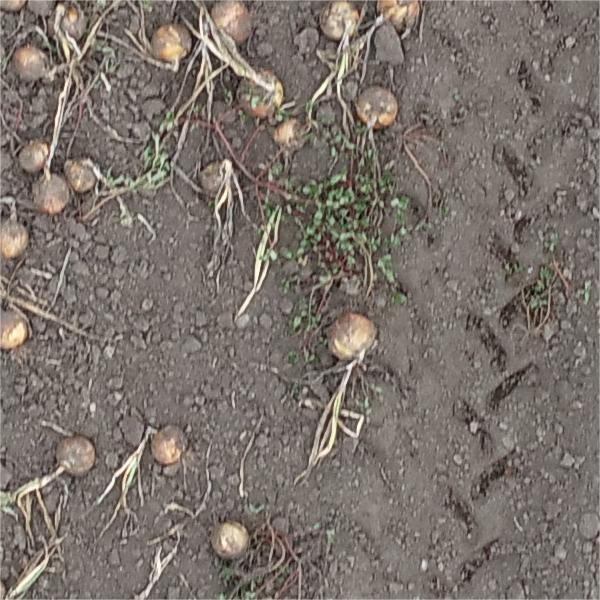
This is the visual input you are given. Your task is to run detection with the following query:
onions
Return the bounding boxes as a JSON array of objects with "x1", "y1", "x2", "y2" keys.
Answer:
[
  {"x1": 56, "y1": 7, "x2": 82, "y2": 34},
  {"x1": 240, "y1": 73, "x2": 281, "y2": 113},
  {"x1": 1, "y1": 306, "x2": 29, "y2": 349},
  {"x1": 0, "y1": 0, "x2": 26, "y2": 13},
  {"x1": 210, "y1": 520, "x2": 248, "y2": 558},
  {"x1": 197, "y1": 160, "x2": 229, "y2": 194},
  {"x1": 32, "y1": 175, "x2": 69, "y2": 213},
  {"x1": 354, "y1": 85, "x2": 396, "y2": 125},
  {"x1": 16, "y1": 140, "x2": 47, "y2": 172},
  {"x1": 149, "y1": 426, "x2": 184, "y2": 463},
  {"x1": 149, "y1": 24, "x2": 185, "y2": 63},
  {"x1": 209, "y1": 4, "x2": 253, "y2": 44},
  {"x1": 55, "y1": 436, "x2": 92, "y2": 474},
  {"x1": 317, "y1": 4, "x2": 358, "y2": 38},
  {"x1": 65, "y1": 158, "x2": 96, "y2": 191},
  {"x1": 271, "y1": 116, "x2": 306, "y2": 147},
  {"x1": 0, "y1": 224, "x2": 30, "y2": 256},
  {"x1": 328, "y1": 313, "x2": 374, "y2": 357},
  {"x1": 380, "y1": 0, "x2": 418, "y2": 32},
  {"x1": 8, "y1": 43, "x2": 47, "y2": 81}
]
